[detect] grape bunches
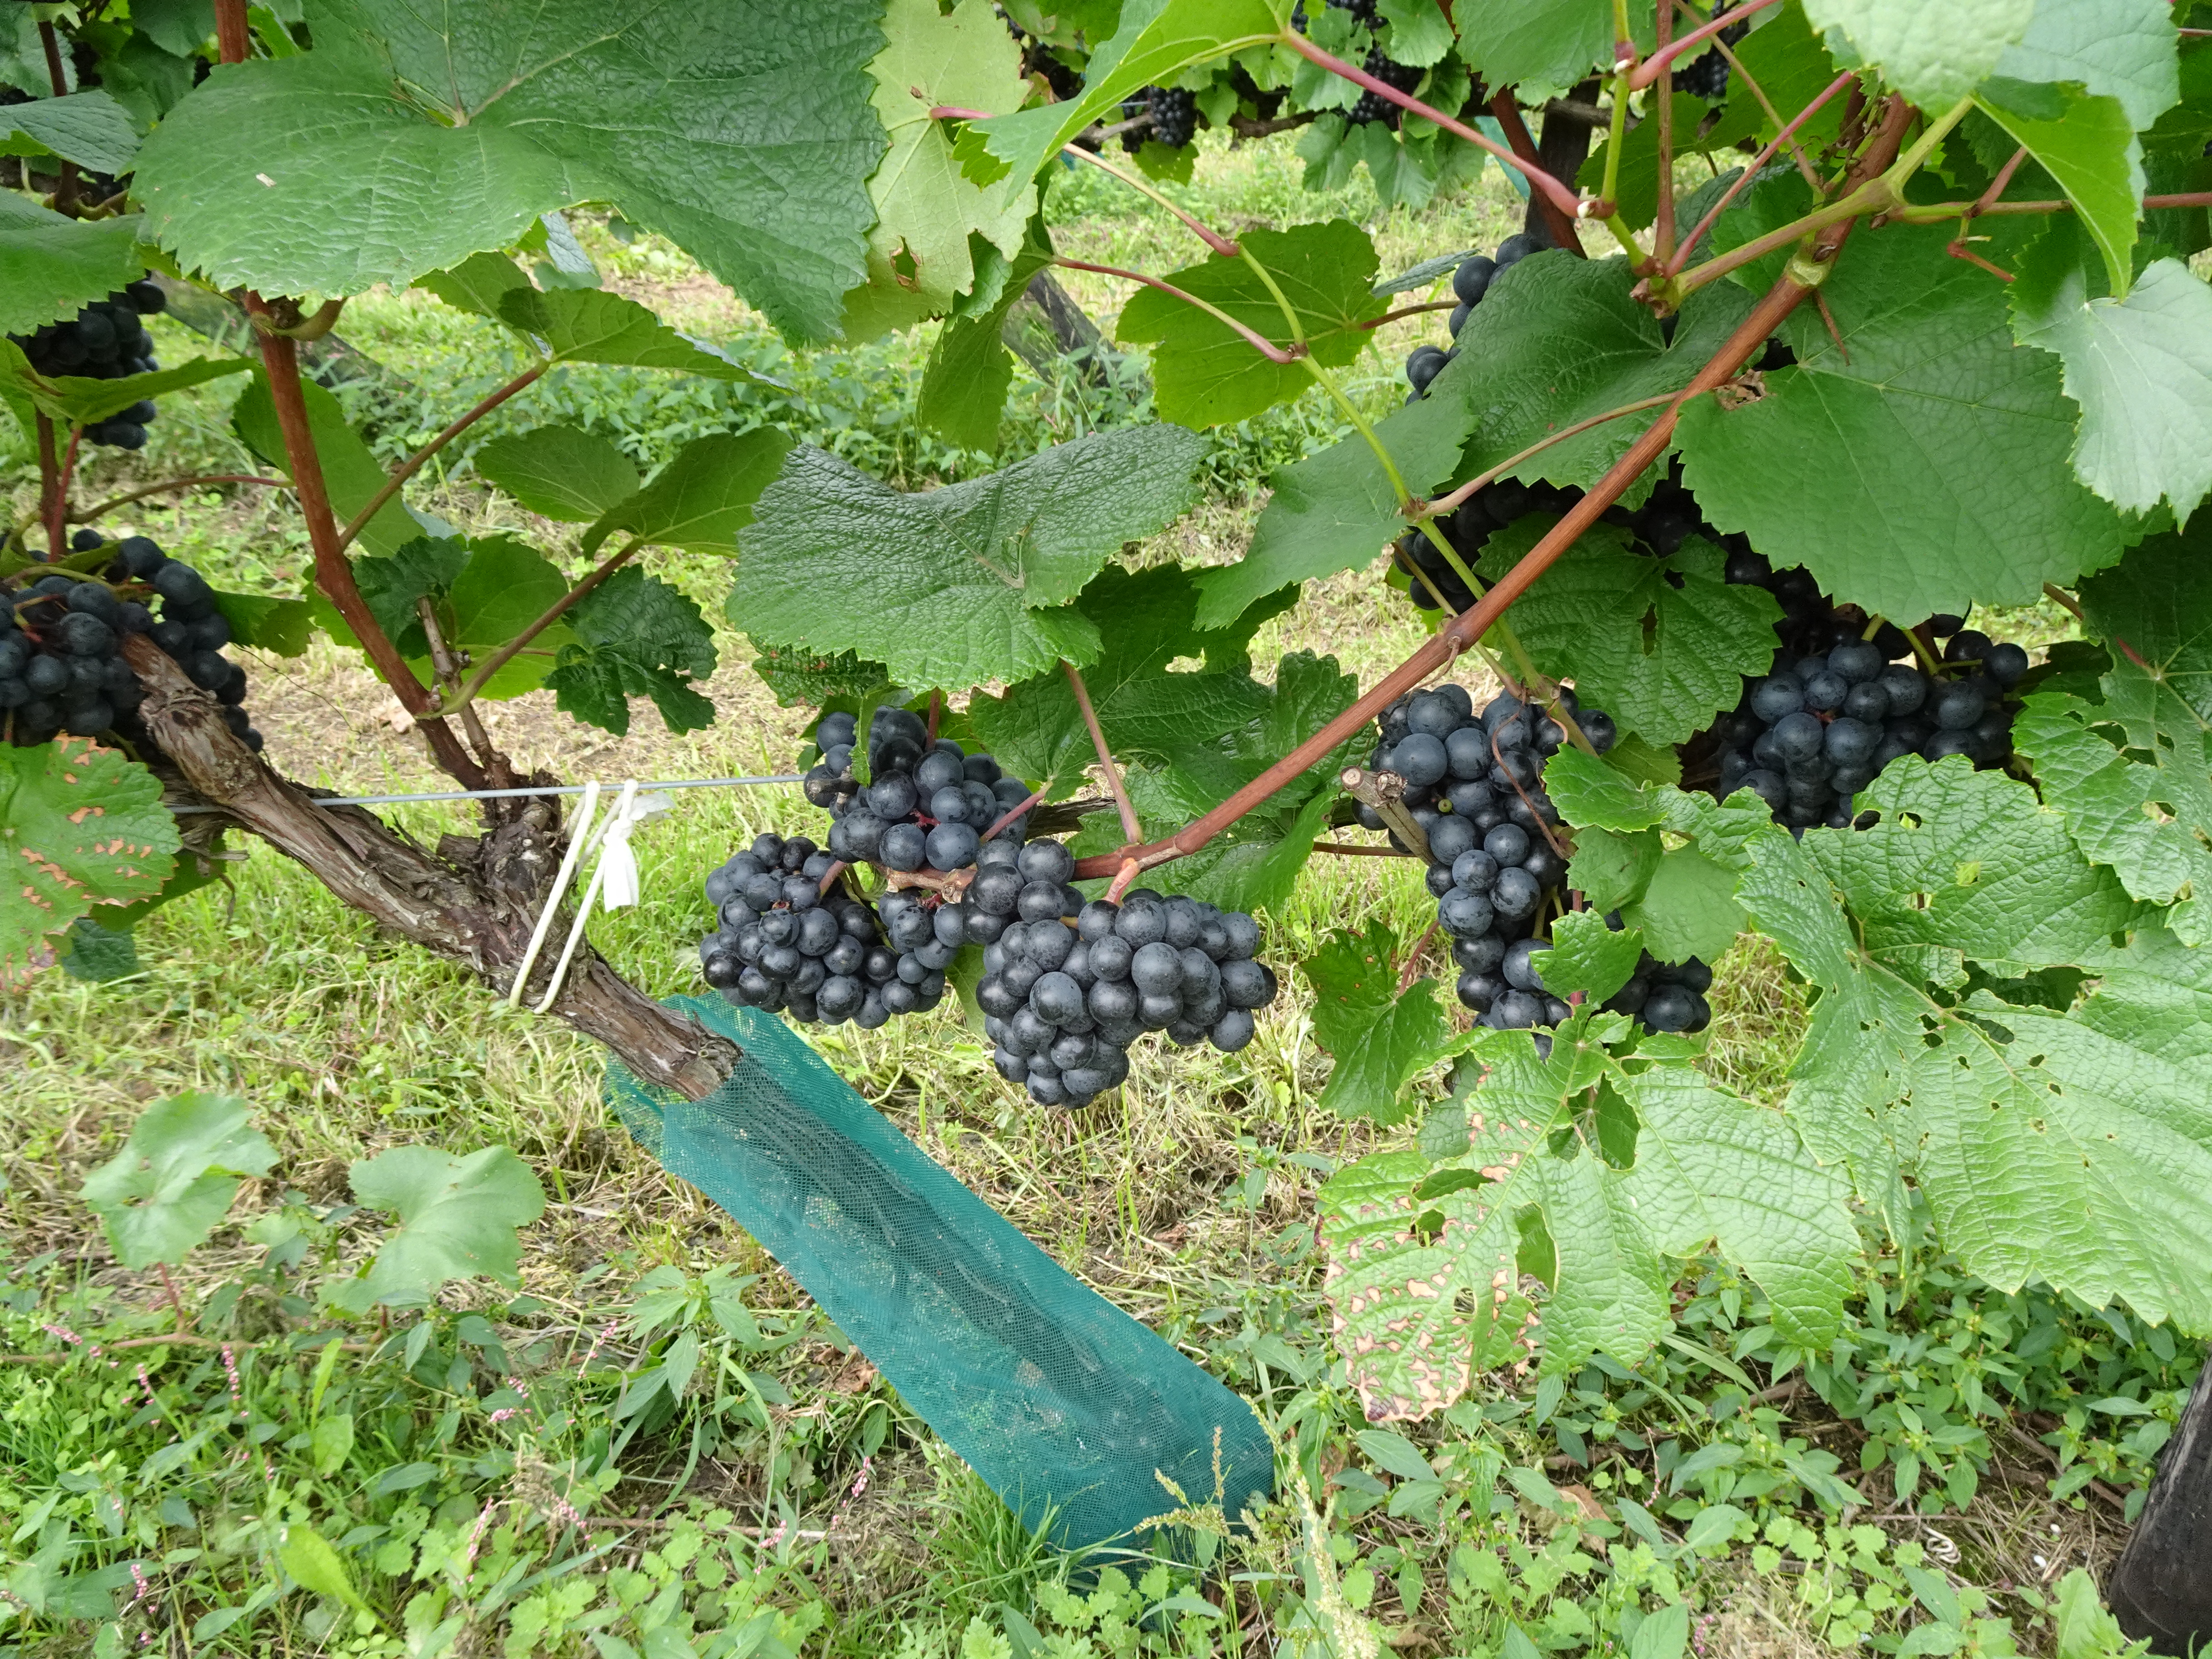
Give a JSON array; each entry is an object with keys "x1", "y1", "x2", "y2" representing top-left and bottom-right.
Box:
[
  {"x1": 969, "y1": 841, "x2": 1139, "y2": 1108},
  {"x1": 1645, "y1": 501, "x2": 1972, "y2": 658},
  {"x1": 1721, "y1": 638, "x2": 1929, "y2": 844},
  {"x1": 803, "y1": 707, "x2": 1034, "y2": 969},
  {"x1": 1089, "y1": 888, "x2": 1277, "y2": 1051},
  {"x1": 700, "y1": 832, "x2": 871, "y2": 1022},
  {"x1": 2, "y1": 529, "x2": 263, "y2": 763},
  {"x1": 1351, "y1": 683, "x2": 1616, "y2": 1059},
  {"x1": 1405, "y1": 234, "x2": 1548, "y2": 405},
  {"x1": 1605, "y1": 900, "x2": 1714, "y2": 1032},
  {"x1": 6, "y1": 282, "x2": 165, "y2": 451},
  {"x1": 854, "y1": 947, "x2": 946, "y2": 1028},
  {"x1": 1924, "y1": 629, "x2": 2037, "y2": 769},
  {"x1": 1393, "y1": 476, "x2": 1572, "y2": 615}
]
